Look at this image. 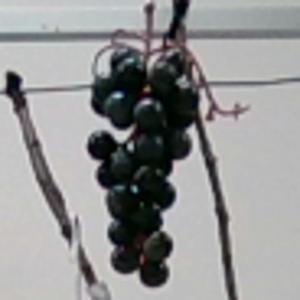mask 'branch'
Here are the masks:
<instances>
[{
    "label": "branch",
    "mask_w": 300,
    "mask_h": 300,
    "mask_svg": "<svg viewBox=\"0 0 300 300\" xmlns=\"http://www.w3.org/2000/svg\"><path fill=\"white\" fill-rule=\"evenodd\" d=\"M23 84L24 79L14 71L6 73L4 93L10 99L12 112L18 120L19 135L41 198L57 225L60 237L72 251L74 262L79 266V270L86 281V294L92 296L94 300H113L106 284L98 279L92 259L87 256L83 245L77 239L72 220L69 218L67 201L55 183L45 150L33 125L28 105V94L24 92Z\"/></svg>",
    "instance_id": "1"
},
{
    "label": "branch",
    "mask_w": 300,
    "mask_h": 300,
    "mask_svg": "<svg viewBox=\"0 0 300 300\" xmlns=\"http://www.w3.org/2000/svg\"><path fill=\"white\" fill-rule=\"evenodd\" d=\"M195 131L199 141V151L206 168L208 188L214 217L217 226L218 253L220 267L228 300H238L235 273L232 265L231 239H230V215L227 208L226 196L223 192L221 170L218 163L217 153L207 137L206 127L203 122L201 108L199 115L194 119Z\"/></svg>",
    "instance_id": "2"
},
{
    "label": "branch",
    "mask_w": 300,
    "mask_h": 300,
    "mask_svg": "<svg viewBox=\"0 0 300 300\" xmlns=\"http://www.w3.org/2000/svg\"><path fill=\"white\" fill-rule=\"evenodd\" d=\"M170 22L162 31V50L173 52L180 49L187 52V17L190 15V7L193 0H170Z\"/></svg>",
    "instance_id": "3"
}]
</instances>
